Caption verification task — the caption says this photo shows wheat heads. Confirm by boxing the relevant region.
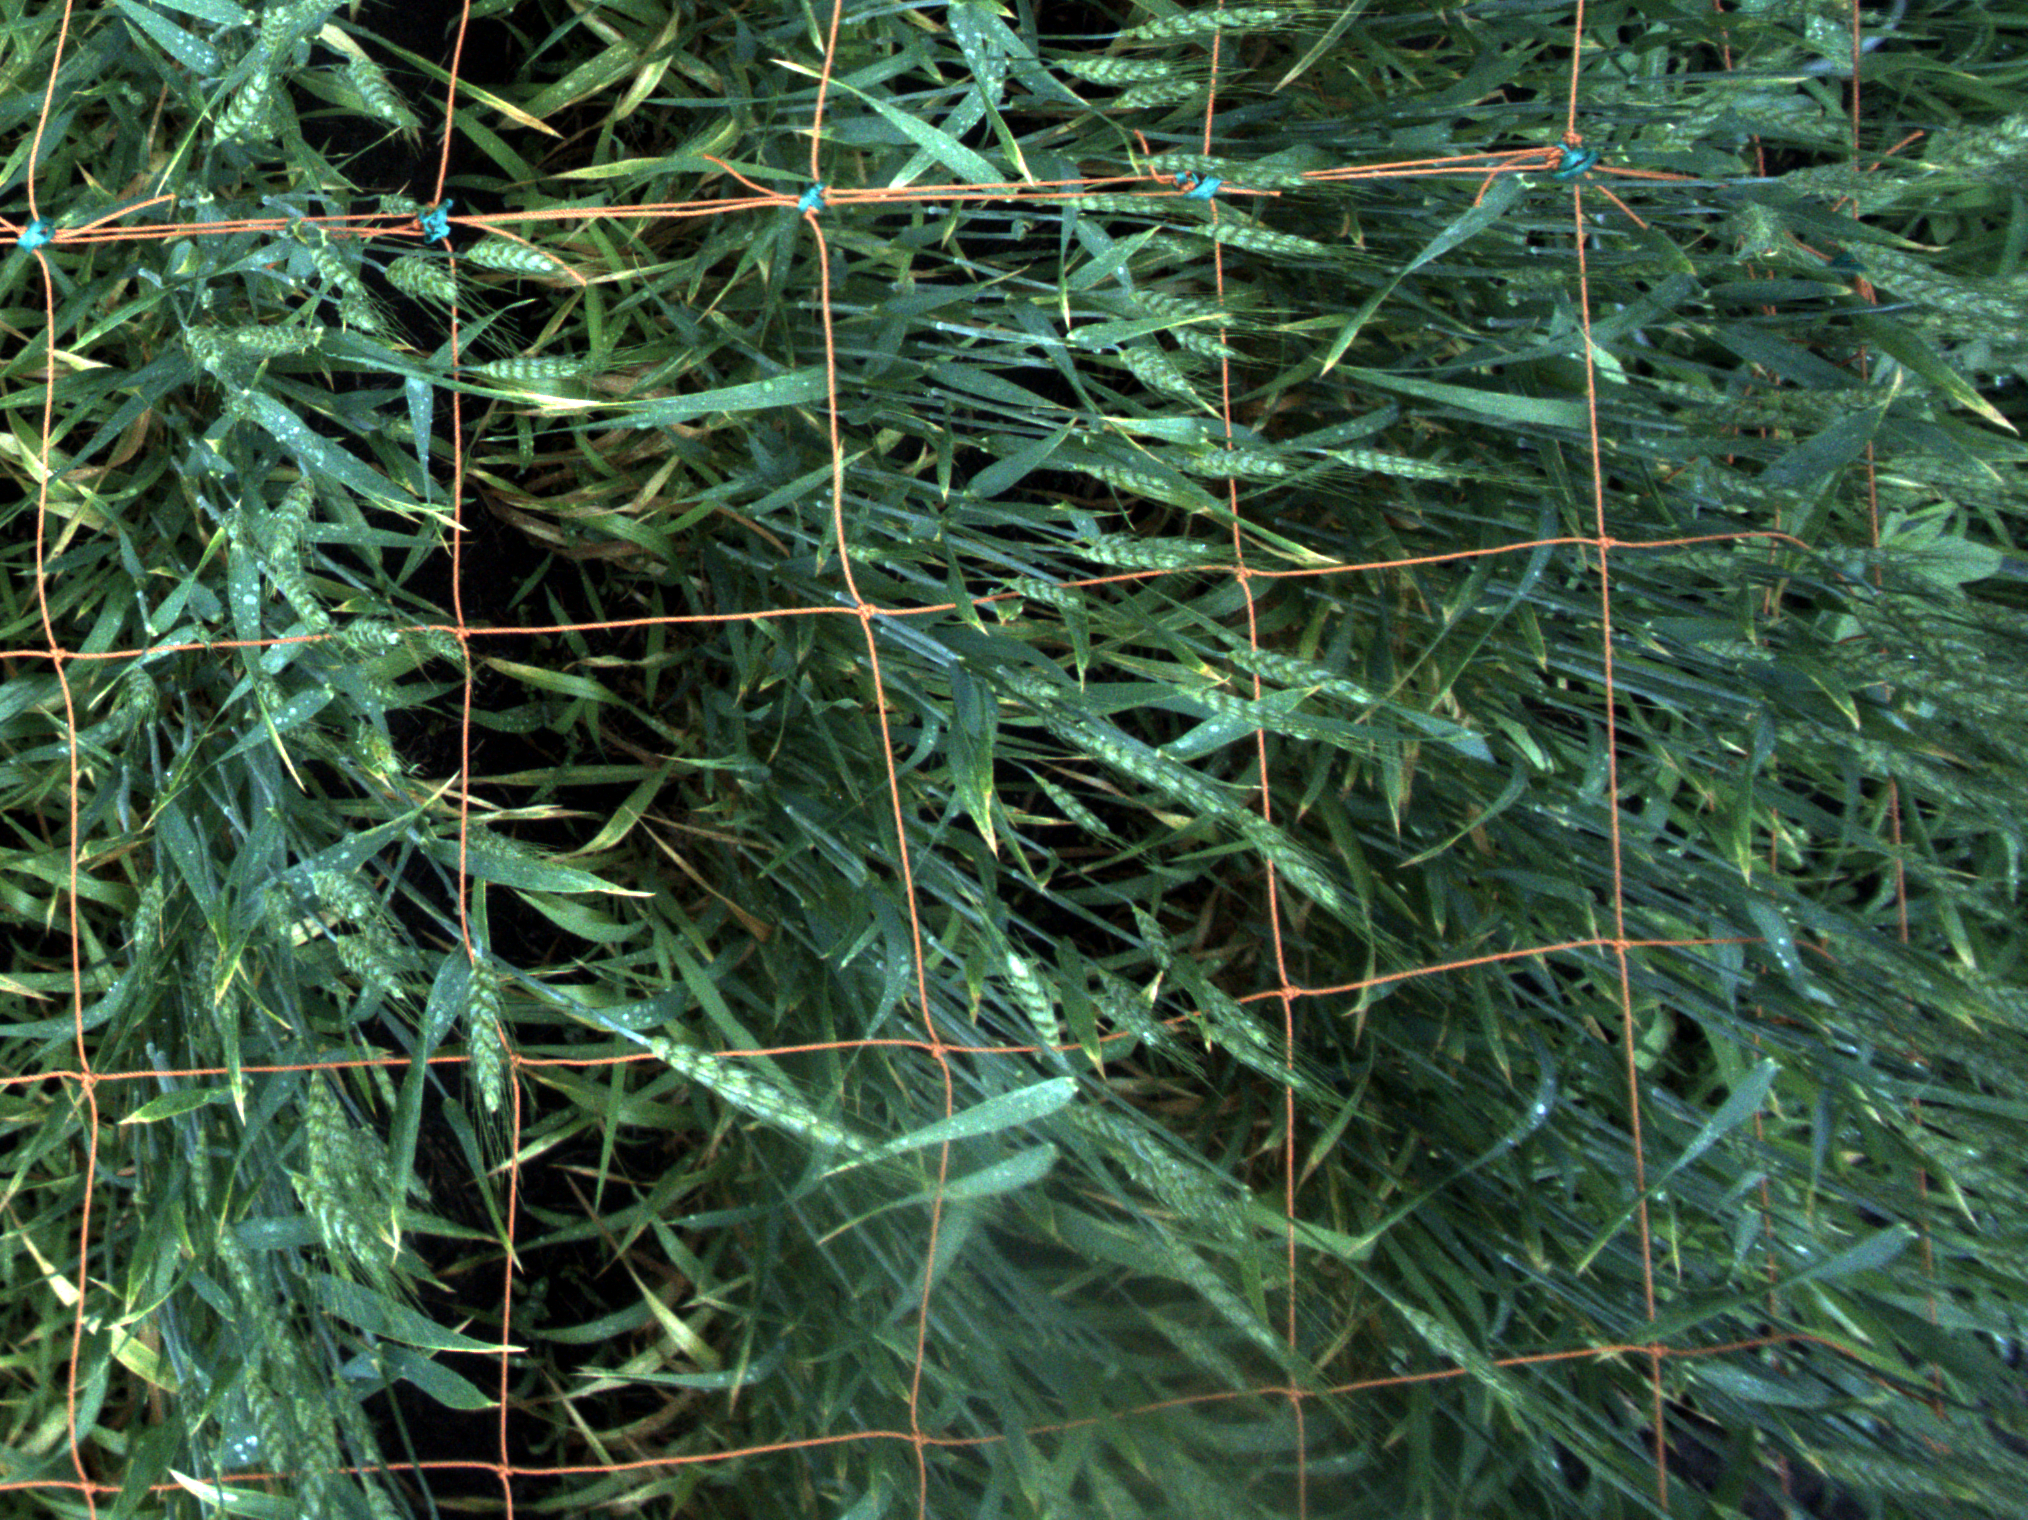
[1094,962,1154,1026]
[1158,1316,1248,1392]
[268,477,314,563]
[1004,946,1065,1055]
[1118,7,1280,42]
[999,671,1060,702]
[1892,563,1941,597]
[1811,1439,1946,1498]
[364,669,400,703]
[1913,1102,2026,1169]
[480,354,584,383]
[1121,236,1181,253]
[232,320,320,355]
[307,869,372,926]
[1658,550,1742,585]
[1840,1165,1955,1229]
[1919,1020,2027,1100]
[1108,1144,1249,1216]
[1181,445,1287,481]
[1844,178,1904,216]
[1004,574,1081,608]
[220,501,254,548]
[1925,311,2024,351]
[464,236,555,275]
[262,1285,300,1372]
[189,1128,212,1211]
[194,927,217,995]
[1893,845,2006,921]
[1133,286,1240,331]
[1886,1115,1988,1193]
[464,953,507,1111]
[1078,728,1229,813]
[1965,596,2027,632]
[1201,1019,1307,1092]
[1742,0,1834,27]
[1740,201,1775,245]
[1173,676,1295,734]
[211,70,270,146]
[299,1398,332,1519]
[1229,644,1375,706]
[307,1066,332,1185]
[1199,971,1270,1047]
[1087,535,1209,561]
[1722,108,1839,138]
[844,541,870,564]
[260,6,274,43]
[378,1135,432,1205]
[1650,89,1738,153]
[306,243,367,299]
[347,48,393,118]
[327,1089,364,1191]
[196,622,214,645]
[1822,1002,1914,1059]
[1824,40,1855,72]
[1051,54,1170,85]
[341,619,404,650]
[123,87,148,107]
[1695,635,1776,664]
[292,1169,388,1266]
[1691,403,1816,432]
[1813,927,1931,987]
[1815,547,1905,567]
[245,1357,291,1471]
[1030,772,1110,836]
[1845,234,1947,282]
[1087,462,1170,495]
[1744,471,1802,502]
[1886,1385,2026,1473]
[1965,166,2026,194]
[1699,462,1763,498]
[1396,1300,1494,1377]
[1653,375,1733,408]
[1194,219,1325,256]
[1973,1238,2026,1285]
[466,815,522,862]
[646,1032,868,1155]
[360,1472,399,1518]
[267,7,292,54]
[1131,900,1174,967]
[1111,79,1199,111]
[1146,152,1308,191]
[1332,445,1449,481]
[334,930,407,999]
[1888,453,1989,488]
[131,873,166,950]
[381,254,459,302]
[1170,1237,1277,1349]
[424,622,463,660]
[1954,486,2026,518]
[1943,958,2026,1029]
[358,917,405,960]
[1759,384,1888,411]
[1117,343,1187,395]
[1173,1449,1242,1519]
[212,1215,262,1317]
[337,303,379,331]
[1168,324,1235,358]
[1952,107,2027,167]
[177,1370,207,1436]
[1814,639,2003,715]
[1863,742,2014,810]
[1614,258,1684,281]
[1774,720,1893,748]
[1590,78,1637,108]
[1494,266,1565,288]
[1886,748,1963,807]
[357,715,401,773]
[252,666,286,709]
[1083,543,1182,570]
[288,723,332,752]
[1843,594,1934,661]
[348,1122,393,1189]
[125,663,159,713]
[332,1367,381,1463]
[1574,185,1647,202]
[262,887,293,933]
[1954,1024,2025,1072]
[1858,269,2024,319]
[1226,797,1343,909]
[1715,1125,1786,1180]
[378,192,419,216]
[292,0,356,21]
[218,968,238,1014]
[1089,995,1154,1046]
[1072,1101,1205,1191]
[276,566,332,628]
[1067,193,1166,215]
[1779,159,1881,203]
[184,321,245,375]
[1874,587,2013,689]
